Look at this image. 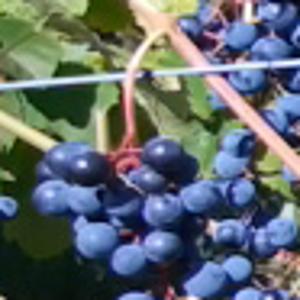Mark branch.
<instances>
[{"label":"branch","mask_w":300,"mask_h":300,"mask_svg":"<svg viewBox=\"0 0 300 300\" xmlns=\"http://www.w3.org/2000/svg\"><path fill=\"white\" fill-rule=\"evenodd\" d=\"M201 80L222 95L226 104L244 125L281 156L285 165L294 174L300 175V157L293 147L277 129L266 124L241 94L236 93L221 75L215 73L201 74Z\"/></svg>","instance_id":"1"},{"label":"branch","mask_w":300,"mask_h":300,"mask_svg":"<svg viewBox=\"0 0 300 300\" xmlns=\"http://www.w3.org/2000/svg\"><path fill=\"white\" fill-rule=\"evenodd\" d=\"M128 4L147 22L163 31V36L171 42L176 51L189 65L209 64L210 58L196 46L181 26L168 15L160 14L144 0H128Z\"/></svg>","instance_id":"2"}]
</instances>
